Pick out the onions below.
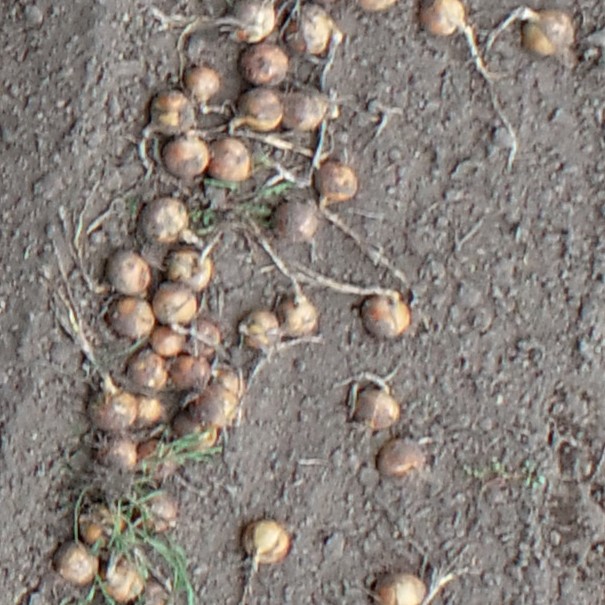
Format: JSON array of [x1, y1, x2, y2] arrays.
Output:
[[523, 10, 571, 57], [164, 250, 211, 290], [244, 519, 290, 561], [164, 134, 207, 177], [149, 88, 192, 132], [231, 2, 279, 42], [242, 43, 287, 84], [417, 2, 464, 35], [153, 282, 198, 322], [167, 353, 209, 391], [185, 66, 223, 100], [102, 560, 143, 600], [174, 407, 216, 452], [374, 572, 426, 604], [241, 309, 278, 349], [89, 388, 135, 429], [137, 442, 173, 473], [207, 138, 250, 182], [359, 291, 409, 336], [357, 390, 399, 429], [277, 291, 316, 334], [140, 197, 189, 243], [126, 351, 169, 389], [294, 10, 332, 51], [94, 434, 136, 468], [133, 398, 164, 426], [54, 541, 96, 584], [201, 388, 241, 426], [110, 298, 154, 337], [278, 202, 320, 242], [107, 251, 151, 295], [140, 580, 171, 605], [314, 161, 357, 203], [140, 490, 178, 529], [189, 324, 223, 354], [358, 0, 392, 12], [378, 438, 426, 479], [238, 86, 283, 132], [152, 327, 184, 356], [283, 88, 332, 129], [78, 509, 126, 547], [214, 365, 244, 397]]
